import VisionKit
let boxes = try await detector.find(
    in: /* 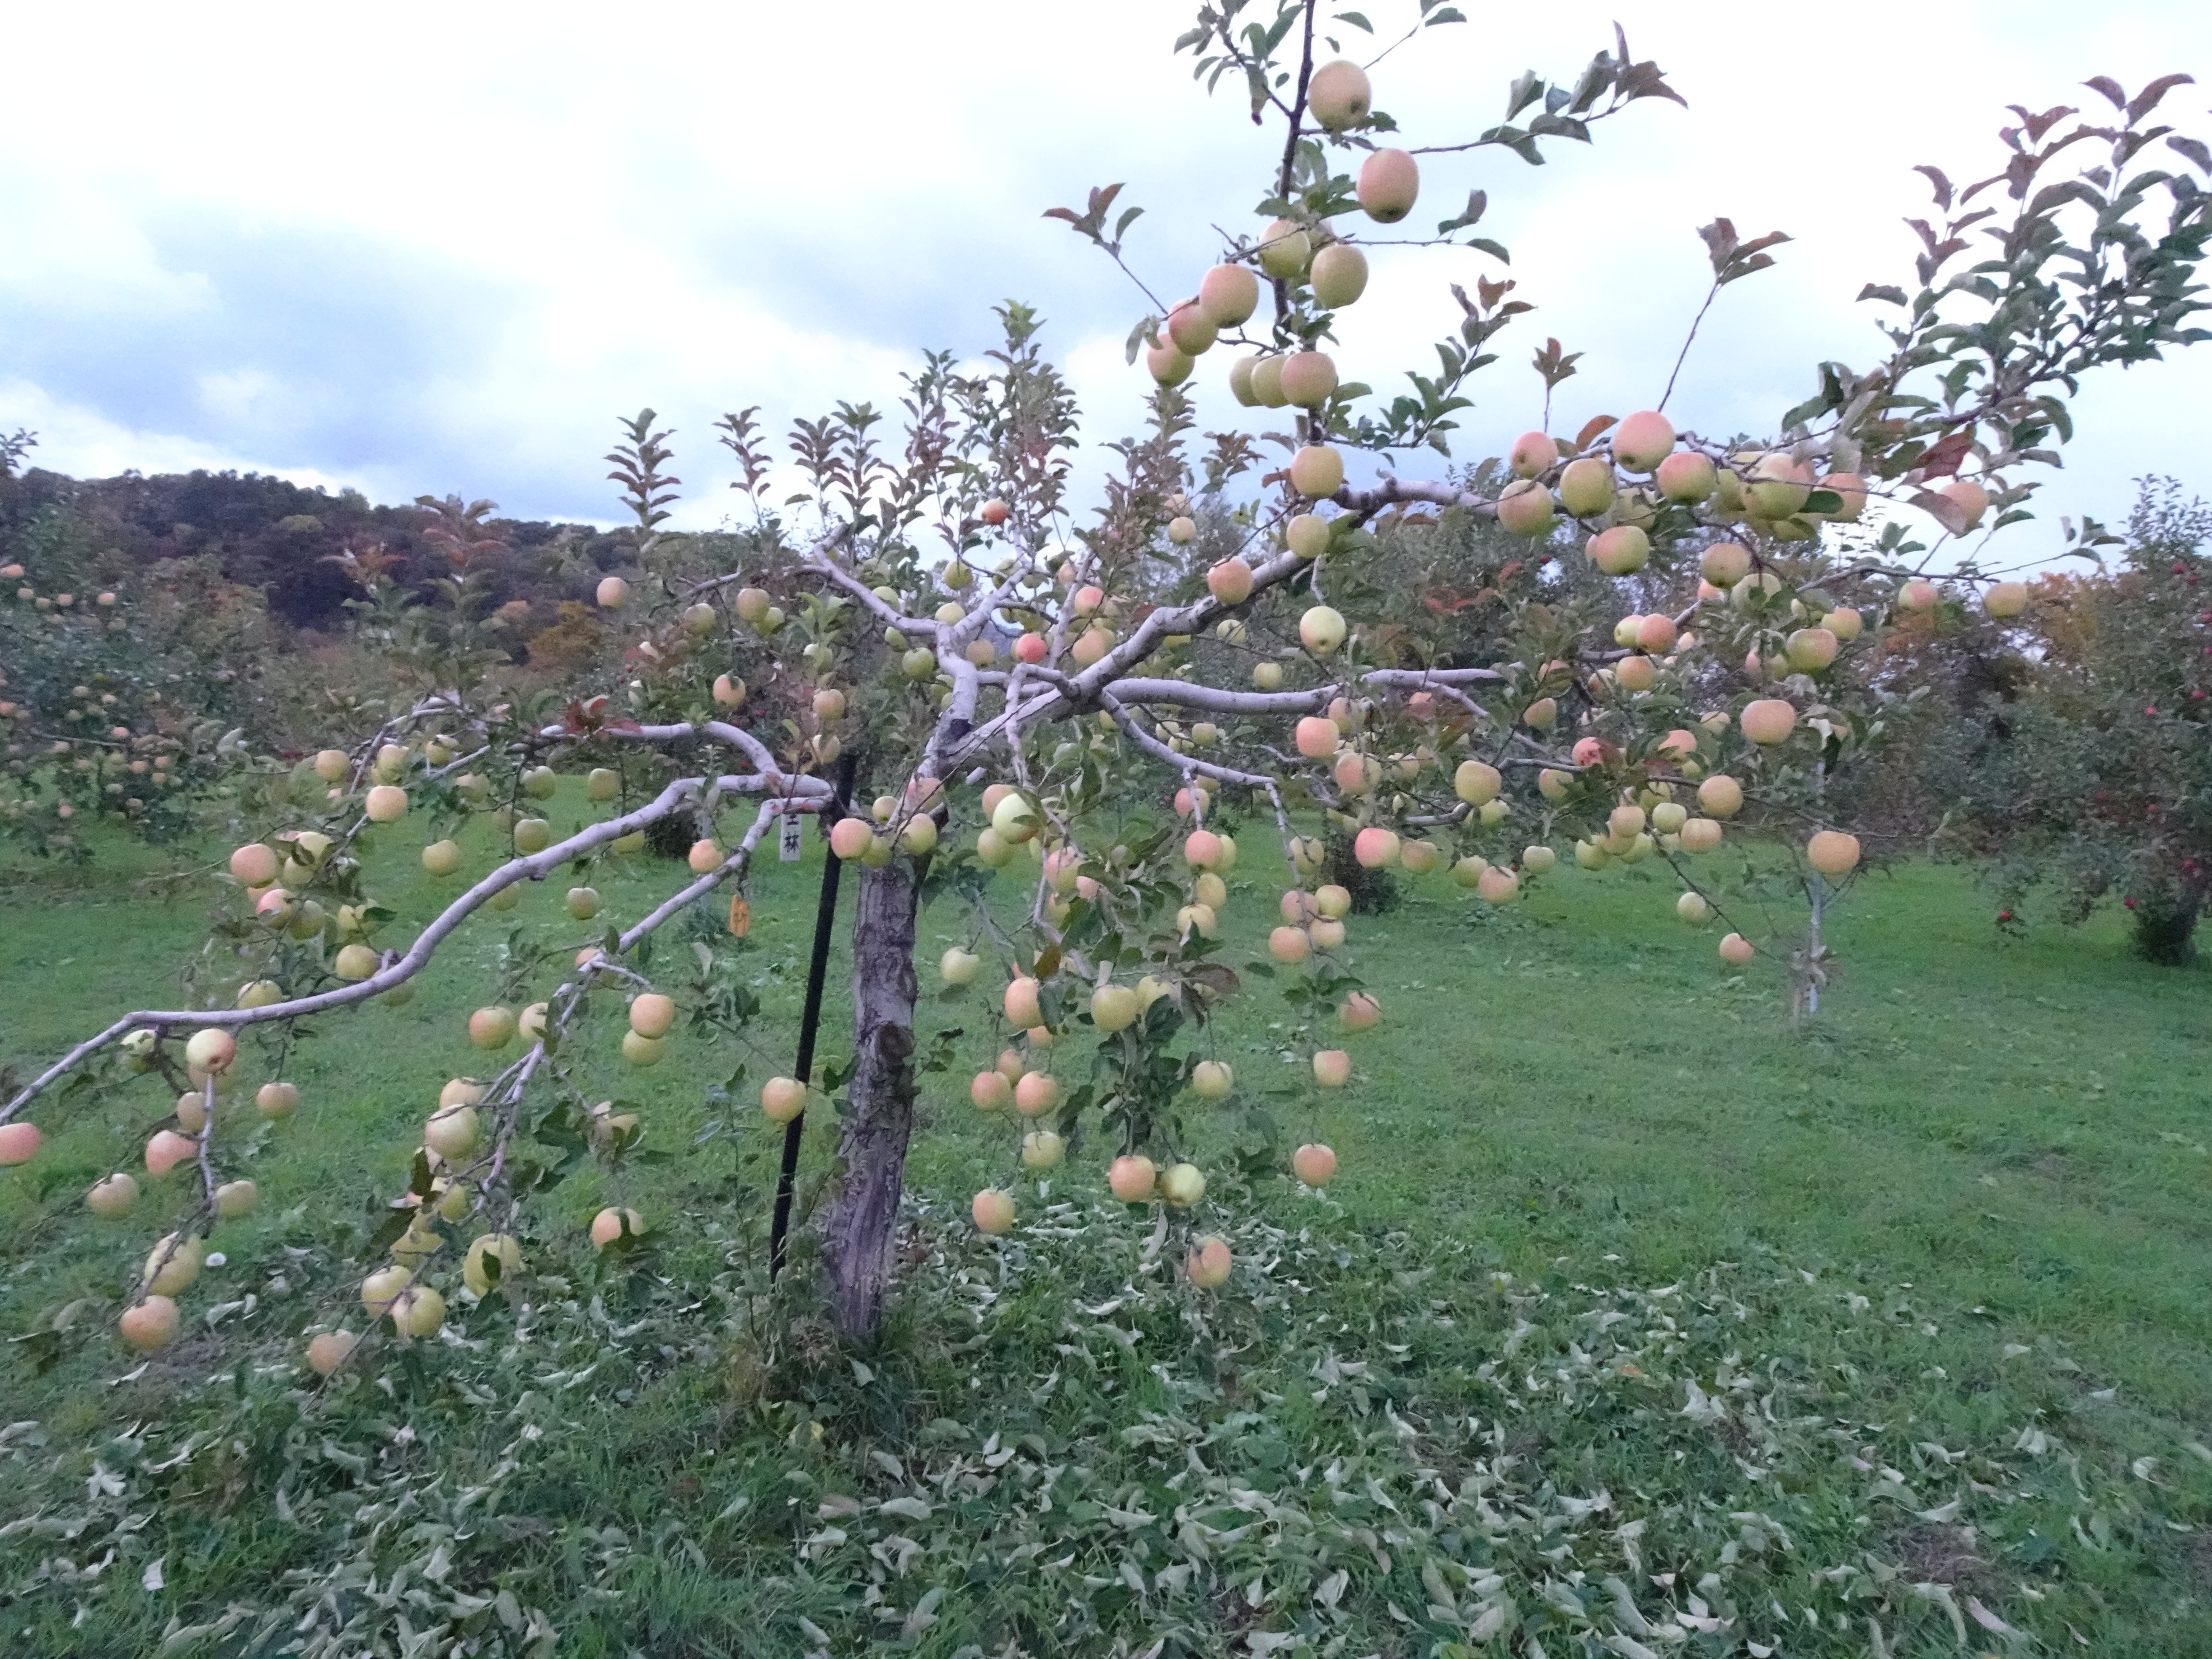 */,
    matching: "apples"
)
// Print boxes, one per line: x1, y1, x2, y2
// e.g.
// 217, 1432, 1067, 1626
410, 1141, 455, 1181
828, 816, 875, 866
1154, 715, 1186, 746
1641, 778, 1675, 810
1895, 575, 1940, 618
1653, 727, 1698, 766
1183, 830, 1224, 874
176, 1093, 217, 1140
1814, 827, 1868, 873
1416, 746, 1445, 777
1563, 592, 1593, 622
980, 496, 1011, 529
144, 1128, 214, 1186
1603, 826, 1632, 858
363, 785, 410, 825
991, 789, 1045, 845
871, 791, 902, 829
1250, 354, 1297, 411
1073, 584, 1109, 622
405, 1175, 467, 1234
1268, 925, 1312, 967
1496, 479, 1556, 539
255, 1080, 301, 1121
334, 943, 385, 986
978, 826, 1019, 869
1679, 817, 1723, 853
1354, 148, 1418, 224
807, 731, 843, 767
1011, 948, 1061, 986
188, 1056, 234, 1094
1609, 805, 1648, 833
244, 871, 287, 907
1799, 586, 1831, 621
1660, 828, 1685, 855
809, 687, 848, 725
1291, 445, 1347, 502
1167, 298, 1226, 357
1579, 706, 1621, 742
1453, 758, 1503, 810
1608, 827, 1655, 864
1212, 832, 1239, 870
1619, 786, 1653, 817
898, 644, 936, 682
390, 1229, 444, 1268
458, 1246, 516, 1295
335, 897, 386, 941
438, 1075, 492, 1118
1791, 596, 1818, 624
635, 570, 664, 602
583, 692, 617, 731
869, 586, 900, 620
1652, 799, 1689, 836
1611, 613, 1653, 655
1426, 719, 1472, 761
1813, 470, 1869, 523
1449, 853, 1492, 889
1342, 801, 1372, 838
1697, 610, 1729, 652
305, 1324, 360, 1383
1677, 893, 1711, 924
1772, 496, 1817, 541
1167, 514, 1197, 551
1382, 750, 1421, 785
627, 680, 660, 710
971, 1071, 1011, 1112
210, 1177, 258, 1222
1740, 453, 1816, 522
1054, 560, 1093, 596
1097, 702, 1123, 734
1332, 753, 1382, 798
1575, 416, 1625, 467
468, 1005, 516, 1050
1042, 886, 1080, 932
1064, 612, 1096, 647
119, 1027, 167, 1073
1004, 976, 1057, 1028
1041, 792, 1074, 825
998, 597, 1024, 622
1279, 350, 1340, 412
229, 843, 279, 890
1184, 964, 1214, 1000
1310, 912, 1346, 953
1191, 721, 1220, 750
1423, 551, 1462, 589
1133, 971, 1180, 1022
802, 641, 839, 676
1570, 733, 1623, 785
1805, 712, 1852, 743
1349, 726, 1380, 757
1345, 630, 1395, 673
1102, 528, 1128, 560
1147, 329, 1198, 391
1280, 889, 1320, 927
1575, 834, 1613, 872
860, 555, 893, 589
595, 571, 632, 614
84, 1170, 140, 1222
935, 941, 980, 988
492, 800, 529, 837
1108, 1153, 1157, 1204
184, 1027, 238, 1075
464, 1231, 521, 1287
517, 1002, 562, 1049
1707, 463, 1746, 519
1175, 905, 1219, 947
1477, 864, 1520, 909
1507, 428, 1560, 483
566, 886, 602, 922
1616, 650, 1660, 693
1088, 981, 1140, 1032
287, 896, 324, 942
1167, 730, 1198, 758
1819, 606, 1861, 644
1454, 798, 1515, 836
1596, 523, 1652, 578
635, 641, 674, 671
1538, 656, 1573, 694
1537, 764, 1575, 803
1158, 1162, 1207, 1212
735, 589, 771, 624
314, 748, 351, 780
0, 1120, 42, 1168
1405, 689, 1440, 722
996, 1047, 1037, 1087
1019, 599, 1046, 630
1698, 709, 1734, 744
2170, 562, 2185, 574
1559, 456, 1621, 520
1295, 715, 1341, 759
324, 785, 360, 815
1655, 449, 1716, 507
360, 1266, 413, 1325
1717, 930, 1757, 971
1597, 487, 1656, 534
1207, 553, 1254, 605
1181, 1236, 1233, 1289
590, 1204, 646, 1256
1174, 661, 1207, 694
1520, 696, 1567, 733
1777, 669, 1822, 706
1583, 532, 1628, 571
1287, 834, 1326, 880
1981, 581, 2028, 619
421, 835, 467, 882
1618, 754, 1651, 784
1028, 824, 1059, 864
456, 781, 492, 820
1291, 1140, 1338, 1188
1783, 627, 1839, 673
1745, 641, 1786, 685
1026, 1024, 1062, 1051
518, 762, 559, 803
961, 637, 996, 670
1330, 738, 1357, 762
1012, 628, 1050, 665
680, 600, 722, 638
514, 816, 551, 857
896, 814, 937, 858
1159, 618, 1195, 650
1227, 353, 1264, 410
483, 878, 526, 913
623, 1026, 666, 1068
1298, 604, 1347, 655
761, 1074, 805, 1122
1338, 988, 1382, 1035
971, 1183, 1016, 1235
1740, 699, 1796, 747
1254, 658, 1286, 696
1354, 825, 1402, 874
1325, 794, 1352, 822
1044, 843, 1086, 893
753, 602, 788, 637
988, 557, 1025, 593
143, 1244, 200, 1300
1697, 773, 1745, 821
1196, 765, 1220, 792
1214, 619, 1245, 645
1729, 572, 1784, 623
1200, 262, 1262, 330
1193, 874, 1229, 911
371, 971, 421, 1005
423, 1103, 480, 1161
391, 1283, 445, 1338
1060, 766, 1103, 804
119, 1295, 184, 1351
1313, 1047, 1353, 1091
586, 766, 625, 806
1400, 840, 1439, 876
255, 887, 302, 930
1277, 642, 1322, 690
1674, 626, 1713, 660
373, 741, 419, 784
1935, 480, 1989, 528
1018, 564, 1046, 589
1588, 667, 1624, 706
1097, 594, 1131, 634
1610, 409, 1675, 474
905, 775, 946, 814
1165, 492, 1195, 521
883, 622, 923, 653
1309, 244, 1369, 310
1191, 1057, 1235, 1100
939, 558, 977, 592
1699, 541, 1751, 590
1307, 57, 1374, 134
1700, 573, 1728, 610
1391, 791, 1424, 818
282, 832, 340, 896
587, 1098, 640, 1147
236, 979, 282, 1023
1680, 751, 1710, 779
1257, 215, 1311, 282
628, 994, 678, 1036
1286, 512, 1332, 561
1634, 613, 1678, 655
689, 836, 727, 876
1329, 696, 1361, 732
420, 732, 466, 773
1290, 210, 1336, 272
981, 783, 1023, 824
935, 598, 966, 632
710, 672, 750, 714
1075, 860, 1114, 909
1022, 1127, 1064, 1172
1068, 626, 1118, 673
612, 814, 646, 854
1313, 884, 1353, 923
1014, 1067, 1060, 1121
1746, 509, 1781, 542
1173, 784, 1211, 825
574, 948, 616, 988
160, 1228, 205, 1271
1522, 843, 1556, 876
